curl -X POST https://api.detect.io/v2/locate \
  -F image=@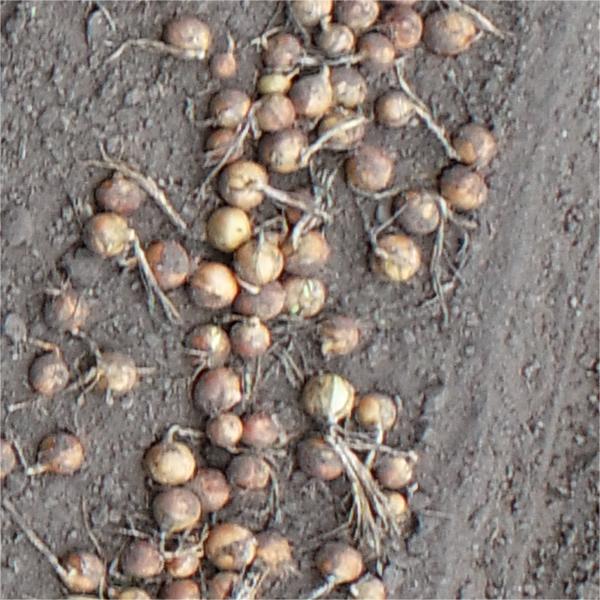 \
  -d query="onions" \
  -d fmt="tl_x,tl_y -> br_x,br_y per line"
289,72 -> 334,117
384,6 -> 422,48
375,88 -> 414,127
372,232 -> 421,280
357,32 -> 396,67
374,452 -> 411,488
162,547 -> 201,577
317,318 -> 360,358
148,241 -> 191,288
315,111 -> 369,152
153,487 -> 203,528
330,69 -> 368,107
229,319 -> 271,359
441,167 -> 485,210
204,572 -> 232,598
83,212 -> 131,257
221,162 -> 265,207
253,530 -> 294,571
97,354 -> 135,395
288,184 -> 327,227
191,366 -> 241,412
37,430 -> 83,475
346,147 -> 395,192
256,70 -> 292,94
209,88 -> 251,130
206,522 -> 252,570
206,205 -> 251,249
315,542 -> 365,587
49,287 -> 90,329
228,453 -> 269,491
300,374 -> 355,422
318,22 -> 353,56
61,549 -> 102,590
209,51 -> 238,82
232,238 -> 283,284
264,32 -> 303,71
288,230 -> 330,272
298,438 -> 344,479
284,277 -> 325,317
164,14 -> 210,56
189,324 -> 231,365
99,176 -> 141,216
427,6 -> 474,54
257,95 -> 296,131
192,470 -> 231,513
398,191 -> 440,233
112,586 -> 155,600
291,0 -> 329,31
27,355 -> 68,393
160,577 -> 199,599
241,408 -> 280,448
146,439 -> 194,486
207,127 -> 245,159
352,576 -> 385,599
450,123 -> 495,166
382,491 -> 413,525
190,261 -> 238,309
207,413 -> 243,446
235,282 -> 285,319
337,0 -> 377,34
262,129 -> 306,173
120,540 -> 160,580
352,393 -> 395,432
0,439 -> 22,477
